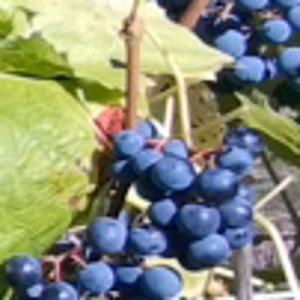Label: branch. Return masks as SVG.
<instances>
[{
    "instance_id": "30e6481e",
    "label": "branch",
    "mask_w": 300,
    "mask_h": 300,
    "mask_svg": "<svg viewBox=\"0 0 300 300\" xmlns=\"http://www.w3.org/2000/svg\"><path fill=\"white\" fill-rule=\"evenodd\" d=\"M147 0H135L124 17L122 39L125 43V97L122 111V125L132 130L139 122L138 69L142 51L144 31L143 13Z\"/></svg>"
}]
</instances>
